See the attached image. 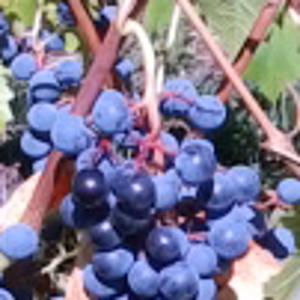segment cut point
I'll use <instances>...</instances> for the list:
<instances>
[{"label": "cut point", "instance_id": "cut-point-1", "mask_svg": "<svg viewBox=\"0 0 300 300\" xmlns=\"http://www.w3.org/2000/svg\"><path fill=\"white\" fill-rule=\"evenodd\" d=\"M134 33L141 48V60L145 72L146 121L152 131H157L156 67L152 55V43L145 28L138 21H129L125 35Z\"/></svg>", "mask_w": 300, "mask_h": 300}]
</instances>
